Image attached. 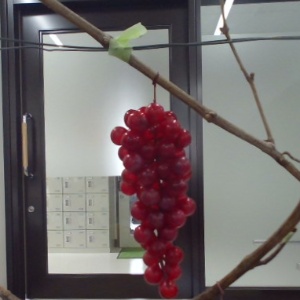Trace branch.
Wrapping results in <instances>:
<instances>
[{
  "instance_id": "branch-2",
  "label": "branch",
  "mask_w": 300,
  "mask_h": 300,
  "mask_svg": "<svg viewBox=\"0 0 300 300\" xmlns=\"http://www.w3.org/2000/svg\"><path fill=\"white\" fill-rule=\"evenodd\" d=\"M300 222V202L293 212L277 227V229L254 252L245 255L239 264L201 294L191 296L192 300H216L229 286L240 277L262 266L268 265L294 236ZM282 243H281V245L278 247V248H276L275 250H274V252L272 253V254L268 255V253L273 249V248H275L276 245L280 244V241L282 240V239H284L286 236H287V238H286Z\"/></svg>"
},
{
  "instance_id": "branch-3",
  "label": "branch",
  "mask_w": 300,
  "mask_h": 300,
  "mask_svg": "<svg viewBox=\"0 0 300 300\" xmlns=\"http://www.w3.org/2000/svg\"><path fill=\"white\" fill-rule=\"evenodd\" d=\"M49 10L55 11L62 15L68 22H70L75 28L86 32L93 37L100 45L108 49L111 36L104 33L96 24L90 23L85 20L71 9L63 5L59 0H40Z\"/></svg>"
},
{
  "instance_id": "branch-1",
  "label": "branch",
  "mask_w": 300,
  "mask_h": 300,
  "mask_svg": "<svg viewBox=\"0 0 300 300\" xmlns=\"http://www.w3.org/2000/svg\"><path fill=\"white\" fill-rule=\"evenodd\" d=\"M221 17L223 21V26L220 27V30L222 31V34L229 42V45L234 53L235 59L238 62V65L240 67L241 72H243V75L245 76L246 80L250 84V88L252 90V95L255 97V100L257 102V108L259 110V114L261 116V119L263 121L266 134L268 137V140L260 141L253 136L249 135L247 132L242 130L239 126L235 125L225 117L220 116L217 112H213L211 109L206 107L204 104H201L199 102L195 101V98H193L189 93L185 92L181 88H179L177 85L172 83L171 81L159 77L158 81L156 82L158 85H160L163 89L170 92L174 97H176L178 100L182 101L183 103L187 104L197 115H199L201 118L205 120L207 123H213L226 131L229 134L234 135L236 138L241 139L245 142H248L255 147L259 148L262 152L267 154L268 156H271L278 164L279 166L286 170L288 173H290L291 176H294L297 182H300V170L296 168L291 162L288 161V159L284 156L287 155L291 160L300 163V159L295 158L289 151L284 150L283 152H279L275 149V139L274 135L272 133V130L270 128V124L268 119L266 118L265 112L263 110V106L259 100L257 89L254 83L255 78V72H251L250 76L249 73L244 66L243 60L239 57L237 53V49L233 45V42L229 36V26L226 23V18L224 14V3H221Z\"/></svg>"
},
{
  "instance_id": "branch-4",
  "label": "branch",
  "mask_w": 300,
  "mask_h": 300,
  "mask_svg": "<svg viewBox=\"0 0 300 300\" xmlns=\"http://www.w3.org/2000/svg\"><path fill=\"white\" fill-rule=\"evenodd\" d=\"M125 62H127L130 66L134 67L135 70L142 73L151 81H153V79L156 76V72L153 69H151L144 61H142L140 58H138L131 52L129 53Z\"/></svg>"
},
{
  "instance_id": "branch-5",
  "label": "branch",
  "mask_w": 300,
  "mask_h": 300,
  "mask_svg": "<svg viewBox=\"0 0 300 300\" xmlns=\"http://www.w3.org/2000/svg\"><path fill=\"white\" fill-rule=\"evenodd\" d=\"M0 291L2 294L7 297L9 300H20V297L15 295L14 292L5 289L4 286L0 285Z\"/></svg>"
}]
</instances>
